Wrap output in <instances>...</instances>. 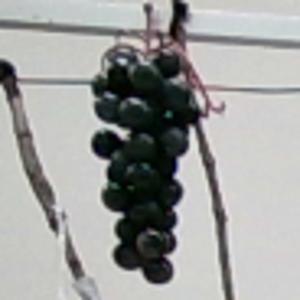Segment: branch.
Returning a JSON list of instances; mask_svg holds the SVG:
<instances>
[{"label": "branch", "instance_id": "obj_1", "mask_svg": "<svg viewBox=\"0 0 300 300\" xmlns=\"http://www.w3.org/2000/svg\"><path fill=\"white\" fill-rule=\"evenodd\" d=\"M0 88L10 116L11 134L17 157L21 162L30 188L46 216L48 227L51 228L60 243L68 272L79 297L81 300H101L94 279L88 277L84 266L76 255L72 237L65 221L67 214L60 208L46 165L37 153L33 140L34 134L30 130L26 118L16 68L8 59H0Z\"/></svg>", "mask_w": 300, "mask_h": 300}, {"label": "branch", "instance_id": "obj_2", "mask_svg": "<svg viewBox=\"0 0 300 300\" xmlns=\"http://www.w3.org/2000/svg\"><path fill=\"white\" fill-rule=\"evenodd\" d=\"M203 123L202 115L199 122L192 125V127L195 131L197 148L211 195L210 206L212 216L214 215L215 218V239L218 244V260L221 268V289L224 294V300H236L234 284L232 281V268L226 224L229 221V217L226 215V210L223 206V195L220 192L219 178L216 175V157L211 152L210 144L206 140V132Z\"/></svg>", "mask_w": 300, "mask_h": 300}, {"label": "branch", "instance_id": "obj_3", "mask_svg": "<svg viewBox=\"0 0 300 300\" xmlns=\"http://www.w3.org/2000/svg\"><path fill=\"white\" fill-rule=\"evenodd\" d=\"M192 10L186 1L172 0V17L168 20V50L177 51L184 60L181 77L191 85V71L186 57L187 25Z\"/></svg>", "mask_w": 300, "mask_h": 300}]
</instances>
